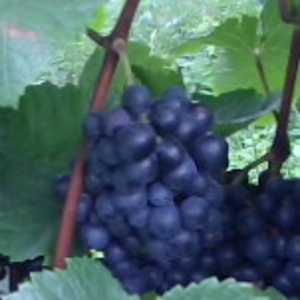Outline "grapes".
Here are the masks:
<instances>
[{
	"instance_id": "obj_1",
	"label": "grapes",
	"mask_w": 300,
	"mask_h": 300,
	"mask_svg": "<svg viewBox=\"0 0 300 300\" xmlns=\"http://www.w3.org/2000/svg\"><path fill=\"white\" fill-rule=\"evenodd\" d=\"M214 112L183 84L161 99L128 85L120 105L88 113L77 205L81 237L129 293L169 292L219 268L239 281L300 289V178L265 169L258 186L231 168Z\"/></svg>"
},
{
	"instance_id": "obj_2",
	"label": "grapes",
	"mask_w": 300,
	"mask_h": 300,
	"mask_svg": "<svg viewBox=\"0 0 300 300\" xmlns=\"http://www.w3.org/2000/svg\"><path fill=\"white\" fill-rule=\"evenodd\" d=\"M72 176L64 175L60 178H57V180L54 183L55 191L59 195L66 196L67 192L69 190V186L71 184Z\"/></svg>"
}]
</instances>
